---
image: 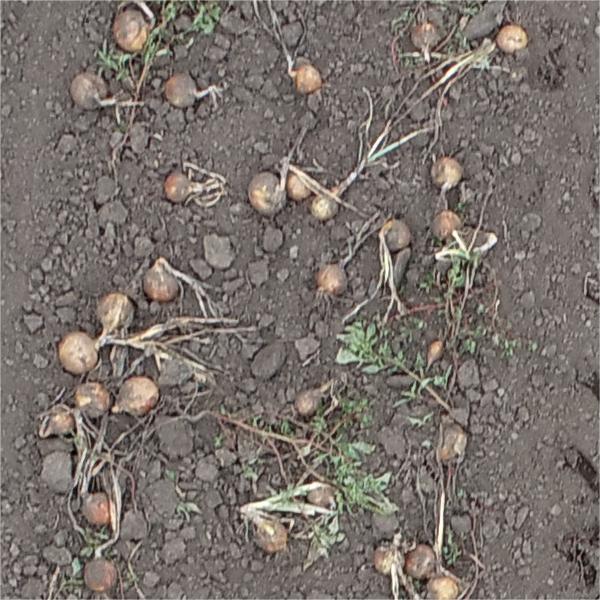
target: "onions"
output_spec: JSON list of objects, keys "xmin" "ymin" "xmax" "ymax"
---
[
  {"xmin": 431, "ymin": 427, "xmax": 467, "ymax": 461},
  {"xmin": 428, "ymin": 207, "xmax": 459, "ymax": 239},
  {"xmin": 116, "ymin": 375, "xmax": 158, "ymax": 414},
  {"xmin": 309, "ymin": 194, "xmax": 336, "ymax": 220},
  {"xmin": 308, "ymin": 481, "xmax": 334, "ymax": 511},
  {"xmin": 142, "ymin": 262, "xmax": 177, "ymax": 300},
  {"xmin": 431, "ymin": 156, "xmax": 462, "ymax": 185},
  {"xmin": 95, "ymin": 293, "xmax": 135, "ymax": 332},
  {"xmin": 314, "ymin": 263, "xmax": 345, "ymax": 294},
  {"xmin": 39, "ymin": 406, "xmax": 73, "ymax": 437},
  {"xmin": 72, "ymin": 70, "xmax": 107, "ymax": 107},
  {"xmin": 289, "ymin": 61, "xmax": 322, "ymax": 94},
  {"xmin": 82, "ymin": 559, "xmax": 117, "ymax": 592},
  {"xmin": 283, "ymin": 166, "xmax": 317, "ymax": 198},
  {"xmin": 163, "ymin": 169, "xmax": 192, "ymax": 201},
  {"xmin": 294, "ymin": 387, "xmax": 321, "ymax": 417},
  {"xmin": 379, "ymin": 218, "xmax": 410, "ymax": 254},
  {"xmin": 369, "ymin": 542, "xmax": 398, "ymax": 574},
  {"xmin": 166, "ymin": 73, "xmax": 204, "ymax": 106},
  {"xmin": 496, "ymin": 23, "xmax": 527, "ymax": 53},
  {"xmin": 248, "ymin": 511, "xmax": 285, "ymax": 552},
  {"xmin": 426, "ymin": 573, "xmax": 459, "ymax": 599},
  {"xmin": 245, "ymin": 171, "xmax": 283, "ymax": 212},
  {"xmin": 77, "ymin": 492, "xmax": 111, "ymax": 530},
  {"xmin": 422, "ymin": 336, "xmax": 444, "ymax": 359},
  {"xmin": 410, "ymin": 18, "xmax": 437, "ymax": 49},
  {"xmin": 75, "ymin": 379, "xmax": 109, "ymax": 414},
  {"xmin": 110, "ymin": 4, "xmax": 151, "ymax": 51},
  {"xmin": 58, "ymin": 331, "xmax": 96, "ymax": 371},
  {"xmin": 404, "ymin": 543, "xmax": 436, "ymax": 576}
]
